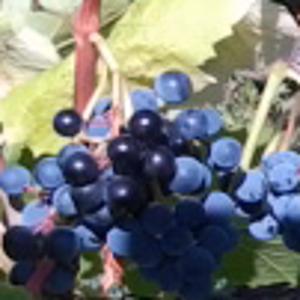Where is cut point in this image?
Masks as SVG:
<instances>
[{"label": "cut point", "instance_id": "6a23745f", "mask_svg": "<svg viewBox=\"0 0 300 300\" xmlns=\"http://www.w3.org/2000/svg\"><path fill=\"white\" fill-rule=\"evenodd\" d=\"M96 48L101 52L105 58V62L108 66V76L111 82L112 95L122 94V79H121V67L116 61V56L109 41L98 34Z\"/></svg>", "mask_w": 300, "mask_h": 300}]
</instances>
